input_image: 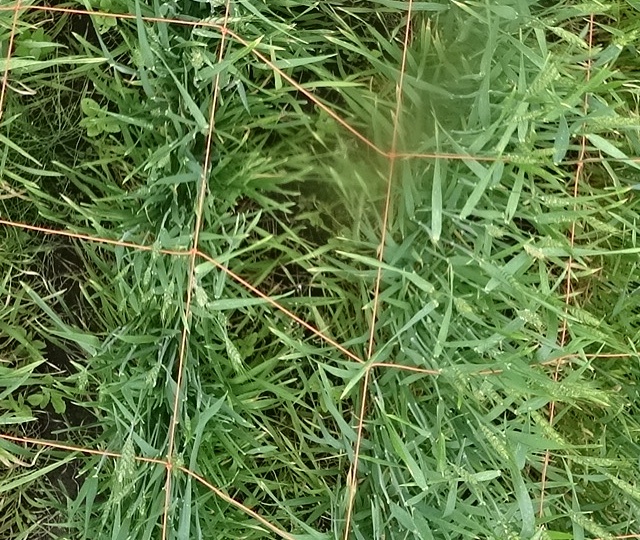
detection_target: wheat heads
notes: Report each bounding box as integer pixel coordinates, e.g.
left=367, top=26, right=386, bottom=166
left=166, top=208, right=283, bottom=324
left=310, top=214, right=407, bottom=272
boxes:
left=447, top=374, right=464, bottom=394
left=146, top=25, right=160, bottom=43
left=451, top=362, right=467, bottom=384
left=521, top=241, right=542, bottom=259
left=116, top=482, right=135, bottom=504
left=191, top=50, right=208, bottom=70
left=166, top=277, right=177, bottom=309
left=548, top=26, right=590, bottom=49
left=584, top=216, right=622, bottom=236
left=505, top=153, right=540, bottom=165
left=141, top=289, right=156, bottom=303
left=479, top=423, right=508, bottom=457
left=150, top=240, right=161, bottom=258
left=223, top=339, right=242, bottom=363
left=521, top=67, right=560, bottom=97
left=160, top=153, right=172, bottom=168
left=125, top=500, right=142, bottom=518
left=571, top=323, right=608, bottom=341
left=116, top=438, right=132, bottom=478
left=557, top=74, right=573, bottom=86
left=573, top=125, right=603, bottom=133
left=485, top=223, right=504, bottom=239
left=516, top=309, right=542, bottom=326
left=149, top=107, right=162, bottom=117
left=449, top=462, right=479, bottom=482
left=454, top=299, right=472, bottom=317
left=538, top=379, right=584, bottom=399
left=531, top=408, right=561, bottom=445
left=117, top=297, right=129, bottom=312
left=541, top=528, right=556, bottom=540
left=566, top=507, right=614, bottom=539
left=567, top=455, right=619, bottom=467
left=198, top=15, right=242, bottom=23
left=133, top=49, right=145, bottom=69
left=507, top=108, right=541, bottom=124
left=500, top=520, right=520, bottom=539
left=615, top=29, right=638, bottom=44
left=530, top=146, right=557, bottom=159
left=77, top=368, right=90, bottom=385
left=566, top=303, right=599, bottom=327
left=145, top=360, right=162, bottom=383
left=140, top=494, right=146, bottom=514
left=573, top=4, right=611, bottom=12
left=607, top=473, right=640, bottom=498
left=170, top=451, right=180, bottom=476
left=484, top=383, right=504, bottom=408
left=496, top=264, right=522, bottom=290
left=592, top=112, right=640, bottom=128
left=195, top=284, right=209, bottom=305
left=539, top=194, right=564, bottom=206
left=114, top=263, right=131, bottom=279
left=141, top=269, right=152, bottom=282
left=536, top=212, right=579, bottom=223
left=101, top=496, right=113, bottom=522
